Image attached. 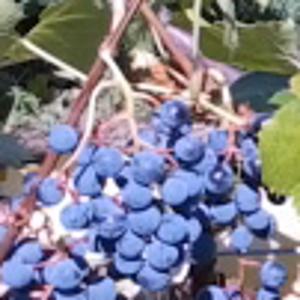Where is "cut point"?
<instances>
[{
    "label": "cut point",
    "mask_w": 300,
    "mask_h": 300,
    "mask_svg": "<svg viewBox=\"0 0 300 300\" xmlns=\"http://www.w3.org/2000/svg\"><path fill=\"white\" fill-rule=\"evenodd\" d=\"M112 54L110 52H104L101 55V60L105 65L111 70L115 80L103 79L97 82L92 89V99L88 106L87 117L84 125L83 133L81 134V139L86 141L90 135L95 109L99 101V92L101 88L105 86H110L116 88L120 86L123 95V102L125 107V112L127 115V126L131 132H134L139 127V121L136 113L138 112L136 100L134 98L133 89L128 81L125 79L122 71L115 60L111 59Z\"/></svg>",
    "instance_id": "1"
}]
</instances>
